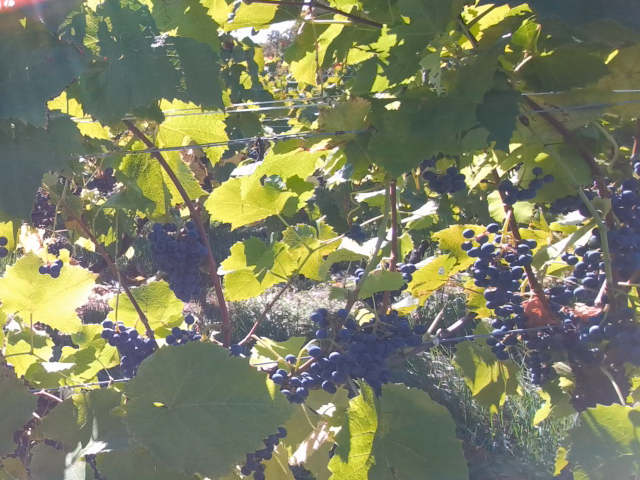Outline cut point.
Segmentation results:
<instances>
[{
	"label": "cut point",
	"instance_id": "3",
	"mask_svg": "<svg viewBox=\"0 0 640 480\" xmlns=\"http://www.w3.org/2000/svg\"><path fill=\"white\" fill-rule=\"evenodd\" d=\"M371 297H372V304H373V308L370 307L366 302H364L362 299L357 298V302H359L361 305H363L366 309H368L372 314H376V301H375V294L371 293Z\"/></svg>",
	"mask_w": 640,
	"mask_h": 480
},
{
	"label": "cut point",
	"instance_id": "5",
	"mask_svg": "<svg viewBox=\"0 0 640 480\" xmlns=\"http://www.w3.org/2000/svg\"><path fill=\"white\" fill-rule=\"evenodd\" d=\"M212 327L218 328L219 330L222 329V326L218 324H209L208 326L204 327V329L202 330V333L207 332V330L211 329Z\"/></svg>",
	"mask_w": 640,
	"mask_h": 480
},
{
	"label": "cut point",
	"instance_id": "1",
	"mask_svg": "<svg viewBox=\"0 0 640 480\" xmlns=\"http://www.w3.org/2000/svg\"><path fill=\"white\" fill-rule=\"evenodd\" d=\"M335 339L334 338H323V339H314V340H309L308 343H306L302 349L299 351L298 355H295L296 359H299L303 356V351L305 350V348H307L310 345H317V344H325V343H334Z\"/></svg>",
	"mask_w": 640,
	"mask_h": 480
},
{
	"label": "cut point",
	"instance_id": "4",
	"mask_svg": "<svg viewBox=\"0 0 640 480\" xmlns=\"http://www.w3.org/2000/svg\"><path fill=\"white\" fill-rule=\"evenodd\" d=\"M190 215L186 216V217H182L179 221H178V227H177V232L175 234V237H179L180 234V230H181V224L185 221V220H189Z\"/></svg>",
	"mask_w": 640,
	"mask_h": 480
},
{
	"label": "cut point",
	"instance_id": "2",
	"mask_svg": "<svg viewBox=\"0 0 640 480\" xmlns=\"http://www.w3.org/2000/svg\"><path fill=\"white\" fill-rule=\"evenodd\" d=\"M250 338L254 341H256L257 343L261 344L269 353L273 352V348L262 338L258 337L257 335H255L254 333L250 334Z\"/></svg>",
	"mask_w": 640,
	"mask_h": 480
}]
</instances>
